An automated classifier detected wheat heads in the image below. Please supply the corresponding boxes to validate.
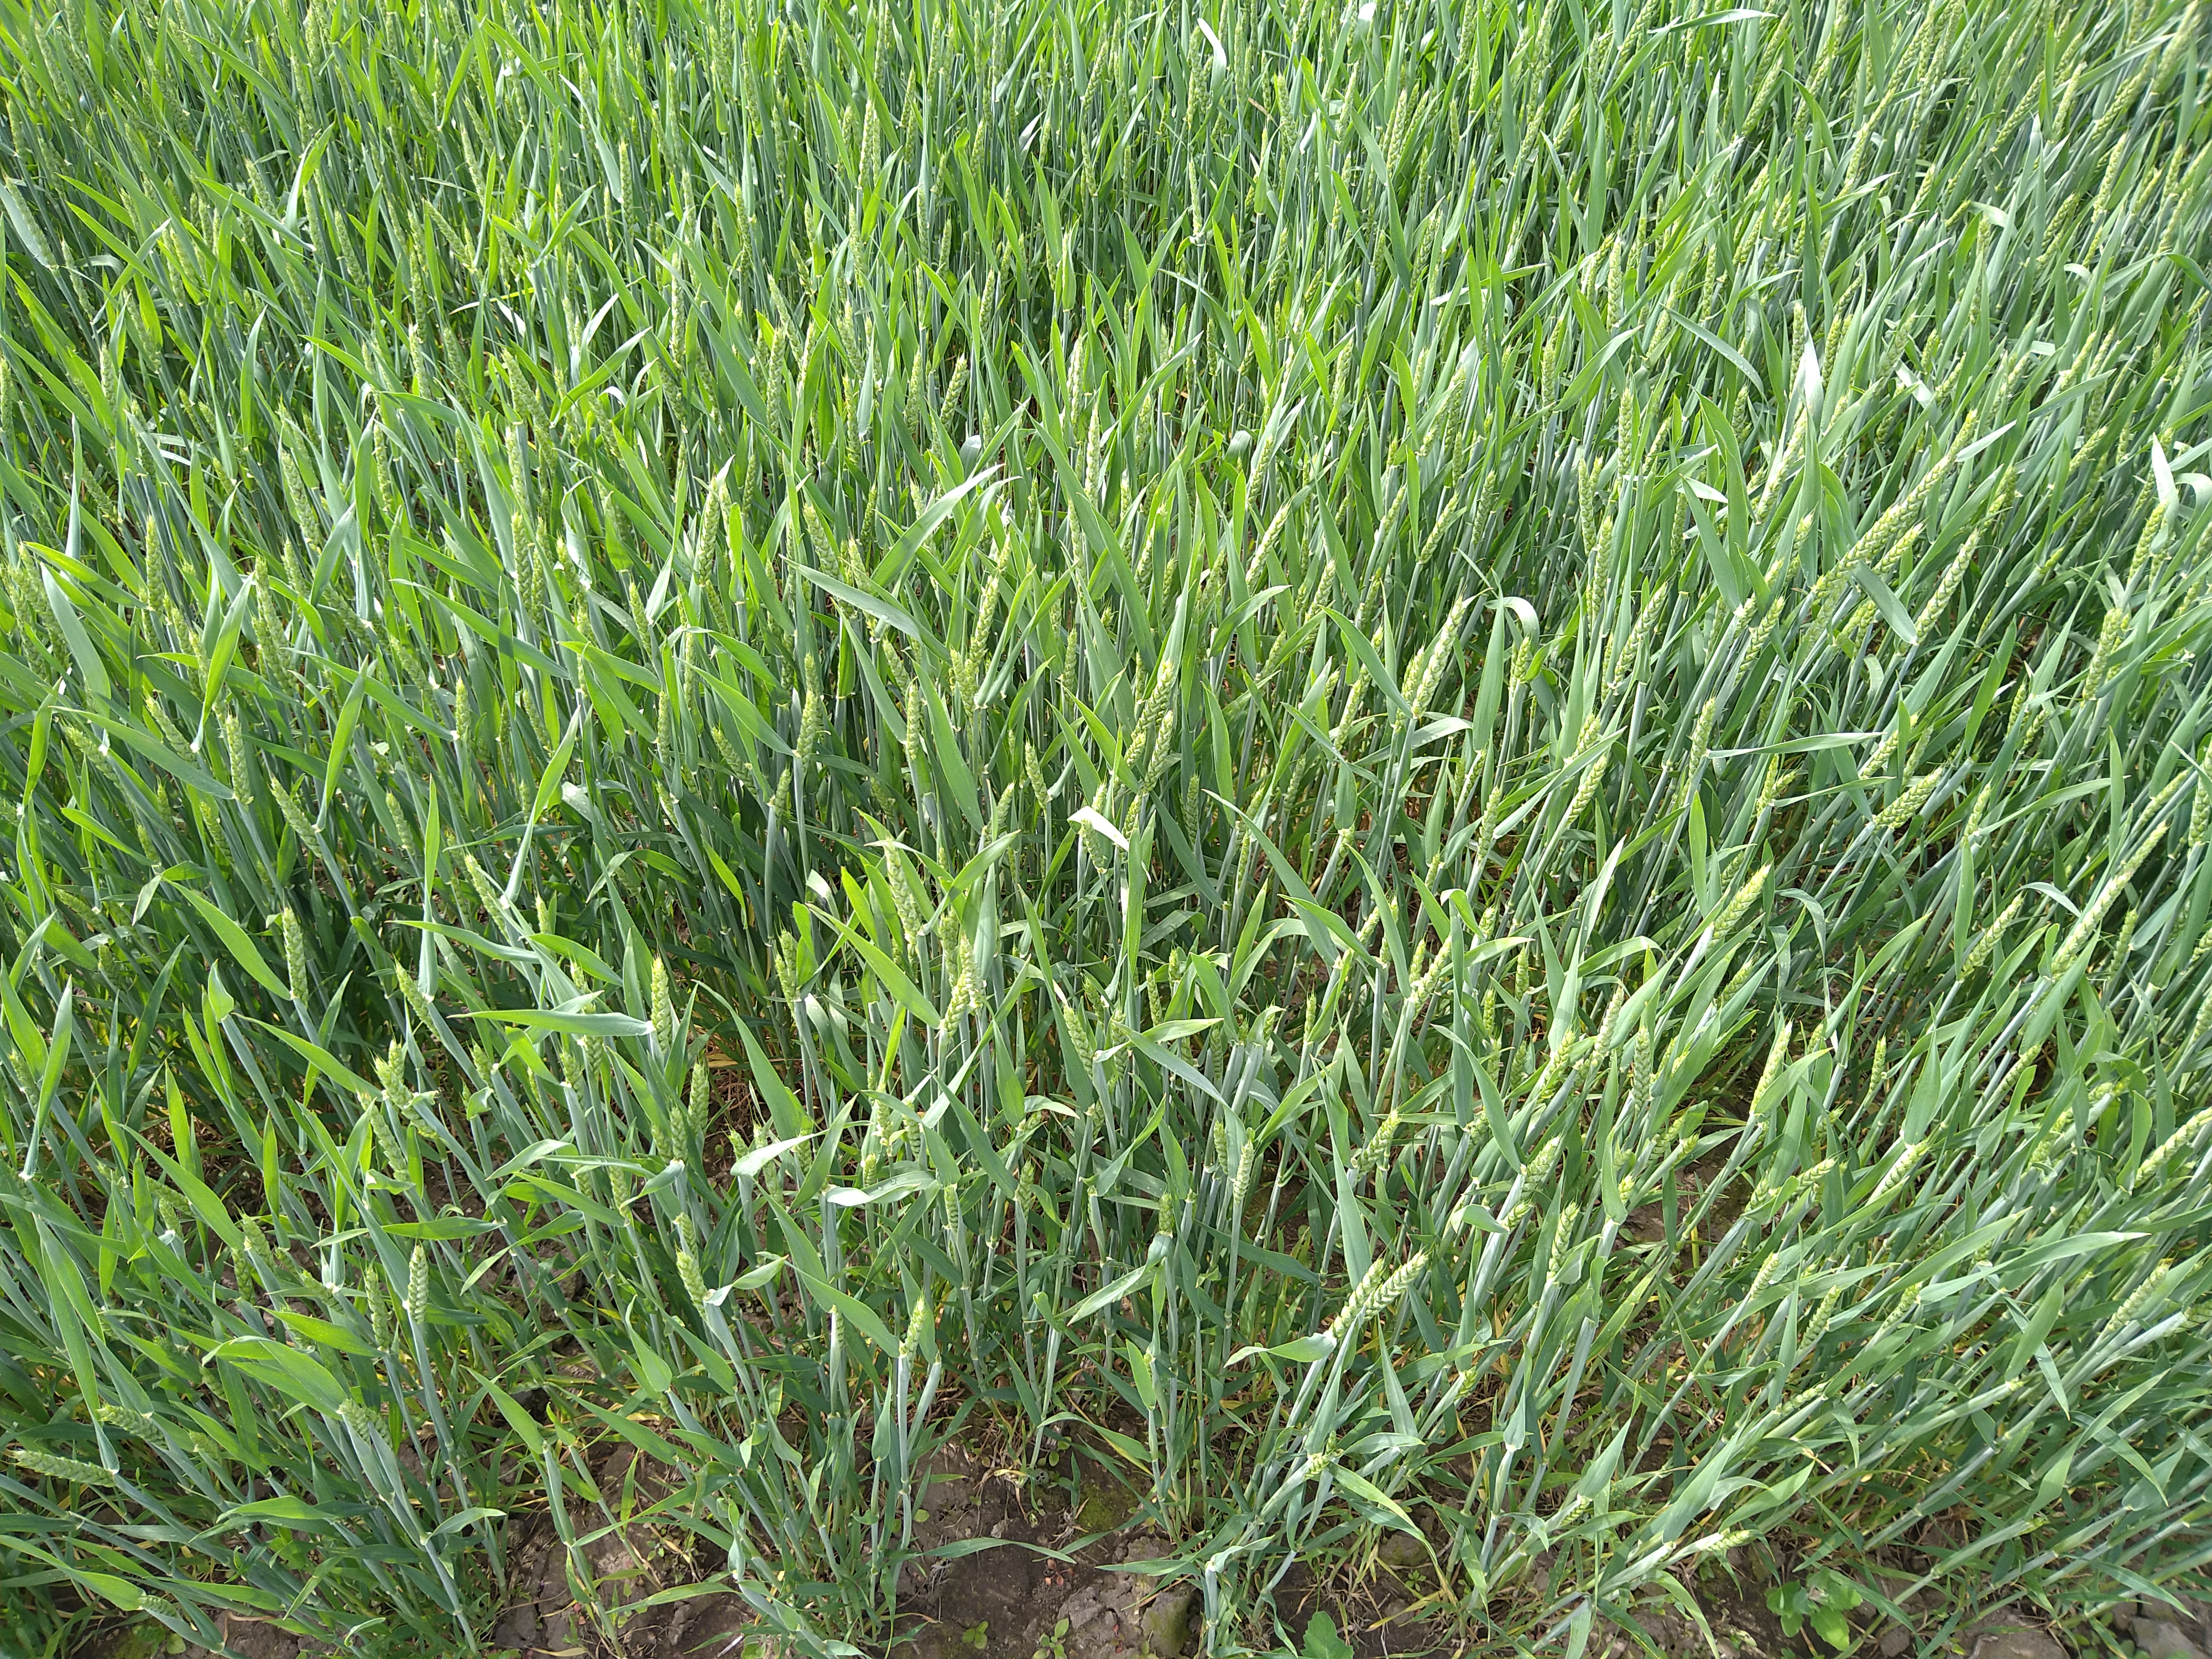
[1418,491,1460,561]
[1380,896,1402,965]
[1579,712,1593,741]
[657,688,671,773]
[255,295,268,331]
[2088,328,2118,379]
[1459,0,1476,64]
[533,893,552,936]
[689,1062,707,1140]
[498,694,509,748]
[177,388,215,446]
[1332,341,1354,398]
[370,416,400,519]
[2000,1044,2042,1092]
[1848,46,1873,118]
[1304,267,1325,304]
[1625,244,1636,272]
[741,452,757,518]
[839,106,853,176]
[267,774,322,861]
[1347,8,1358,46]
[461,95,503,173]
[2069,330,2100,376]
[305,410,323,458]
[440,326,470,407]
[1400,82,1422,138]
[765,273,804,361]
[932,146,951,197]
[140,590,161,654]
[558,1050,586,1110]
[905,352,924,436]
[299,1272,346,1317]
[655,364,701,424]
[1421,366,1464,445]
[792,1128,812,1179]
[1009,92,1019,145]
[576,608,591,694]
[2134,1108,2212,1186]
[653,782,677,824]
[2090,133,2130,219]
[137,0,160,27]
[1573,988,1626,1078]
[1809,1022,1823,1055]
[671,1251,709,1326]
[1274,77,1300,153]
[1573,720,1604,762]
[602,184,614,255]
[1918,28,1933,81]
[1960,893,2026,977]
[147,59,172,104]
[1471,468,1498,552]
[64,0,90,66]
[1707,1530,1754,1551]
[5,97,39,181]
[2173,350,2192,388]
[803,652,823,700]
[243,162,281,222]
[2031,1082,2121,1170]
[1721,88,1734,123]
[500,360,559,468]
[903,1294,927,1370]
[2058,10,2072,38]
[2101,1263,2173,1341]
[1127,520,1156,600]
[1099,606,1113,634]
[905,102,915,162]
[934,843,947,873]
[2117,424,2127,467]
[1599,36,1614,75]
[2040,195,2078,251]
[1066,500,1090,609]
[1536,1030,1580,1100]
[146,514,166,617]
[836,1306,846,1349]
[571,1163,593,1200]
[1890,794,1930,827]
[12,926,39,968]
[18,28,31,58]
[680,171,696,242]
[1243,45,1252,87]
[1326,1427,1338,1456]
[2184,518,2212,571]
[165,176,182,212]
[58,36,103,110]
[998,239,1013,296]
[1636,212,1646,265]
[10,1170,36,1205]
[475,736,495,773]
[123,123,151,172]
[982,91,999,138]
[1367,163,1376,201]
[2155,28,2197,94]
[222,715,251,808]
[1063,626,1076,723]
[791,21,816,92]
[1876,404,1900,438]
[649,956,672,1067]
[1561,1498,1591,1527]
[1850,365,1856,386]
[585,18,602,53]
[2176,573,2210,615]
[752,1124,779,1201]
[1234,10,1249,97]
[281,540,311,600]
[404,208,429,274]
[903,1103,923,1160]
[289,48,319,127]
[1449,97,1459,151]
[917,263,926,322]
[940,358,970,436]
[58,724,129,800]
[1184,58,1215,120]
[1414,346,1430,399]
[7,567,67,638]
[1877,317,1916,377]
[154,784,175,840]
[859,480,878,541]
[1794,56,1837,133]
[2086,380,2108,444]
[842,301,853,330]
[845,538,877,623]
[423,198,470,263]
[1006,846,1016,887]
[788,238,812,287]
[847,202,863,255]
[1052,17,1064,77]
[864,1070,876,1106]
[842,368,862,474]
[197,400,250,468]
[767,330,785,436]
[1698,246,1718,324]
[383,790,415,858]
[1978,217,1990,262]
[120,189,141,237]
[2175,1299,2212,1333]
[1114,790,1152,858]
[320,576,378,658]
[624,583,648,661]
[666,68,686,168]
[1126,733,1146,769]
[2131,428,2179,518]
[1158,1191,1177,1231]
[2185,991,2212,1051]
[882,839,917,985]
[1416,156,1431,209]
[93,343,122,413]
[940,954,975,1036]
[1410,598,1471,718]
[2187,742,2212,858]
[1134,648,1144,703]
[1789,514,1815,578]
[1205,320,1220,374]
[491,224,527,278]
[303,188,332,273]
[542,71,555,89]
[1854,575,1901,654]
[1096,17,1105,63]
[970,532,1014,667]
[1889,12,1909,59]
[60,240,95,320]
[387,1039,404,1086]
[1484,1037,1502,1089]
[138,1594,182,1620]
[250,618,291,698]
[877,4,893,94]
[497,254,511,288]
[1606,242,1624,333]
[801,504,840,583]
[943,1183,960,1234]
[705,27,735,106]
[1462,1106,1495,1150]
[1060,1004,1094,1083]
[1038,58,1048,91]
[873,117,883,186]
[1384,485,1407,535]
[1983,358,2026,425]
[777,28,790,98]
[1980,0,1995,37]
[1689,699,1717,784]
[1766,202,1793,262]
[863,1154,875,1189]
[737,186,751,271]
[719,484,731,541]
[1821,315,1844,389]
[1087,1081,1120,1138]
[1066,336,1082,423]
[1710,598,1726,658]
[1390,646,1424,732]
[2081,452,2110,499]
[628,0,646,98]
[758,338,770,403]
[1896,410,1983,532]
[1471,786,1503,858]
[561,297,574,347]
[2003,678,2027,736]
[1637,23,1649,56]
[1844,131,1867,184]
[745,52,760,129]
[1735,598,1784,685]
[1911,43,1945,121]
[1629,107,1653,165]
[654,265,662,296]
[1410,935,1426,990]
[748,0,757,38]
[2083,230,2102,266]
[938,219,952,270]
[1936,353,1967,399]
[1337,66,1359,129]
[1988,69,2056,151]
[1448,434,1469,484]
[1733,382,1750,444]
[1141,480,1160,539]
[1805,504,1903,602]
[189,192,202,238]
[187,632,228,728]
[1234,1137,1254,1204]
[980,782,1016,848]
[1573,457,1595,558]
[279,0,292,23]
[795,692,821,780]
[973,12,983,73]
[460,855,510,938]
[668,1106,688,1161]
[667,251,687,364]
[647,0,660,26]
[1159,322,1168,368]
[1304,1446,1344,1476]
[2126,500,2169,588]
[1516,947,1529,1002]
[778,926,798,990]
[978,270,996,352]
[1750,1127,1767,1156]
[695,456,733,584]
[15,544,71,674]
[1333,630,1383,752]
[284,265,319,322]
[1237,337,1257,373]
[875,1085,889,1136]
[1888,24,1931,92]
[355,1094,407,1181]
[616,143,637,235]
[213,459,247,522]
[526,1063,543,1107]
[1280,758,1307,822]
[8,1050,55,1136]
[98,942,122,983]
[1108,19,1122,74]
[1880,1280,1924,1330]
[161,51,178,90]
[653,225,666,254]
[1671,489,1693,562]
[158,1199,184,1239]
[1835,0,1853,24]
[1478,905,1494,936]
[1207,1028,1223,1085]
[1601,14,1613,61]
[80,458,118,524]
[1875,769,1945,827]
[993,186,1012,239]
[773,953,796,1010]
[1294,588,1307,622]
[361,1267,391,1353]
[2047,819,2169,982]
[1564,744,1613,830]
[1832,272,1866,315]
[1841,315,1855,351]
[1512,1039,1526,1089]
[83,123,121,204]
[518,688,553,762]
[915,185,929,257]
[1188,159,1203,236]
[968,117,983,178]
[1281,121,1291,163]
[166,17,189,53]
[1870,1034,1888,1093]
[1957,39,1972,94]
[141,694,199,772]
[1234,786,1264,844]
[1389,96,1408,178]
[650,107,675,170]
[1202,546,1227,611]
[1770,1159,1838,1202]
[2127,0,2145,47]
[1704,866,1772,954]
[1526,0,1557,124]
[1605,119,1614,160]
[1790,302,1808,399]
[119,287,163,375]
[1550,322,1563,348]
[1125,301,1130,334]
[1656,194,1666,256]
[1144,970,1162,1027]
[504,94,519,134]
[1383,109,1397,163]
[1278,156,1288,186]
[1742,558,1786,620]
[1611,581,1670,685]
[531,518,547,628]
[1359,1254,1432,1324]
[1957,274,1968,301]
[1967,275,1981,326]
[405,325,433,404]
[1542,342,1556,430]
[1722,962,1757,1006]
[192,800,237,867]
[389,960,439,1039]
[1300,536,1310,575]
[1080,974,1105,1024]
[940,31,956,98]
[238,209,253,253]
[1022,742,1048,810]
[1509,642,1516,690]
[1826,396,1849,433]
[462,123,488,208]
[1219,0,1230,49]
[338,1400,373,1445]
[501,434,535,522]
[903,682,921,763]
[1186,357,1195,390]
[250,560,297,682]
[145,1175,192,1214]
[274,1247,302,1285]
[1084,410,1100,515]
[1078,128,1096,195]
[1773,775,1799,794]
[55,887,107,934]
[1293,0,1312,40]
[1407,219,1436,292]
[861,316,882,384]
[1261,53,1272,109]
[501,0,521,59]
[1855,526,1924,597]
[1617,1172,1633,1208]
[1362,568,1384,622]
[199,194,214,254]
[583,1001,600,1075]
[1794,213,1814,254]
[999,32,1009,75]
[1304,993,1316,1045]
[1083,822,1104,868]
[451,677,473,754]
[900,67,917,129]
[1580,240,1614,303]
[1483,986,1496,1036]
[834,276,848,312]
[333,210,365,288]
[1046,237,1056,290]
[1588,36,1601,99]
[161,597,174,625]
[467,1043,495,1089]
[277,906,307,1005]
[2160,191,2195,256]
[1092,782,1111,816]
[1630,1028,1653,1123]
[1739,64,1780,133]
[362,1407,393,1450]
[1268,227,1290,304]
[1127,0,1142,22]
[41,139,64,193]
[32,20,68,102]
[605,58,623,106]
[810,394,818,457]
[2162,147,2186,210]
[1735,208,1775,265]
[1356,1112,1401,1184]
[164,89,198,152]
[1546,1202,1580,1284]
[510,376,529,422]
[575,316,584,346]
[2152,344,2161,370]
[1144,553,1180,616]
[1814,1108,1844,1140]
[1457,756,1486,813]
[795,330,821,403]
[1796,1287,1846,1352]
[681,631,695,711]
[926,13,938,101]
[144,181,161,211]
[2079,609,2131,701]
[2090,51,2155,151]
[409,88,443,146]
[1373,229,1386,286]
[564,250,575,315]
[1811,1165,1846,1206]
[1517,636,1534,684]
[1857,730,1897,782]
[1992,13,2036,107]
[447,4,481,85]
[1934,1,1965,91]
[2019,711,2053,748]
[1482,0,1493,23]
[1252,1,1258,61]
[1750,1254,1780,1299]
[1602,626,1615,706]
[13,1447,115,1487]
[959,937,982,1010]
[1332,153,1352,229]
[567,959,589,995]
[1643,417,1676,477]
[1513,1136,1564,1200]
[1744,1153,1775,1214]
[2053,63,2087,133]
[1130,663,1179,738]
[785,513,800,574]
[1238,1019,1249,1044]
[769,770,792,814]
[114,94,161,154]
[1619,385,1632,483]
[1765,410,1809,507]
[1761,752,1784,794]
[707,730,758,800]
[1900,722,1935,778]
[1080,168,1086,203]
[1684,0,1702,64]
[1109,1009,1129,1083]
[275,402,307,463]
[588,402,628,470]
[1081,42,1109,118]
[704,578,731,638]
[1243,436,1278,514]
[1513,116,1541,170]
[710,217,722,258]
[387,196,409,260]
[303,0,323,66]
[1439,372,1468,452]
[721,0,732,64]
[2058,31,2084,84]
[1062,55,1074,97]
[694,352,714,396]
[3,176,56,272]
[1117,476,1135,574]
[1880,1142,1928,1197]
[1419,932,1453,1004]
[2135,167,2159,209]
[1915,494,2007,642]
[993,5,1001,82]
[1236,828,1250,895]
[407,243,425,338]
[173,608,200,690]
[1017,1156,1034,1221]
[94,1400,169,1450]
[678,765,701,801]
[1274,301,1281,337]
[555,192,565,248]
[1245,174,1258,213]
[882,640,909,694]
[370,1058,436,1137]
[1584,582,1593,644]
[804,202,813,248]
[726,1129,748,1164]
[904,478,926,524]
[612,504,639,555]
[835,320,865,384]
[1484,36,1529,130]
[1400,92,1430,159]
[507,53,529,128]
[948,648,976,725]
[1187,26,1211,122]
[0,356,16,454]
[675,432,687,480]
[1642,1115,1685,1169]
[1590,517,1616,632]
[104,902,130,926]
[1677,237,1704,292]
[1750,13,1789,89]
[0,575,53,687]
[139,75,155,127]
[1113,53,1127,115]
[68,374,93,410]
[275,449,319,545]
[1355,904,1385,950]
[858,109,872,188]
[193,1359,227,1402]
[171,225,201,292]
[130,402,155,490]
[1469,46,1480,108]
[391,636,443,720]
[1325,1257,1389,1345]
[1184,776,1200,858]
[1911,167,1934,212]
[230,1248,259,1303]
[241,289,256,325]
[1801,36,1837,110]
[512,510,532,621]
[172,0,198,63]
[1016,232,1026,263]
[2069,425,2109,478]
[1945,160,1969,203]
[299,110,313,159]
[1749,1020,1793,1122]
[1040,119,1050,161]
[1211,1123,1228,1175]
[162,228,185,304]
[1143,712,1173,789]
[1964,782,1994,838]
[18,64,37,109]
[1238,502,1286,595]
[2103,910,2141,991]
[575,67,608,180]
[1263,1012,1277,1046]
[774,103,789,188]
[1819,231,1832,265]
[376,0,388,24]
[648,1123,673,1165]
[606,1163,634,1220]
[2186,927,2212,964]
[676,1212,698,1263]
[385,17,403,88]
[933,902,960,988]
[1123,147,1133,205]
[1550,102,1583,153]
[407,1245,428,1330]
[1259,630,1287,681]
[1303,562,1338,642]
[1136,389,1154,450]
[1500,1206,1537,1232]
[1620,0,1660,60]
[980,408,996,455]
[243,1214,273,1267]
